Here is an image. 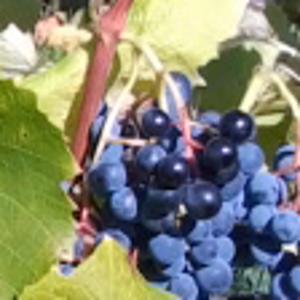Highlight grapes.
I'll use <instances>...</instances> for the list:
<instances>
[{"label":"grapes","mask_w":300,"mask_h":300,"mask_svg":"<svg viewBox=\"0 0 300 300\" xmlns=\"http://www.w3.org/2000/svg\"><path fill=\"white\" fill-rule=\"evenodd\" d=\"M109 238L114 241L125 252H130L134 247V240L121 226H105L94 235V246L99 248L101 242Z\"/></svg>","instance_id":"b958b902"},{"label":"grapes","mask_w":300,"mask_h":300,"mask_svg":"<svg viewBox=\"0 0 300 300\" xmlns=\"http://www.w3.org/2000/svg\"><path fill=\"white\" fill-rule=\"evenodd\" d=\"M159 108L140 123L123 122L104 100L90 139L89 181L108 199V212L126 227L155 234L147 251L159 275L150 279L184 300L222 296L234 282L240 248L237 226L250 252L271 272L273 300H300V260L285 246L300 243V213L283 207L297 180L296 146L278 148L273 172L253 142L258 128L247 112L197 110L190 79L170 70Z\"/></svg>","instance_id":"01657485"}]
</instances>
